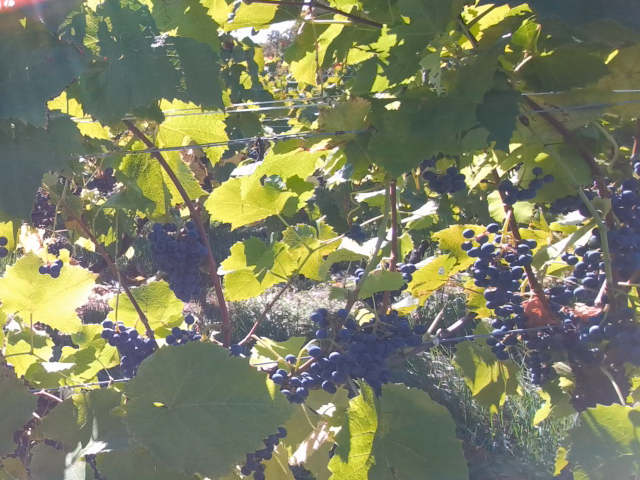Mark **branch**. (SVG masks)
<instances>
[{
	"label": "branch",
	"instance_id": "obj_9",
	"mask_svg": "<svg viewBox=\"0 0 640 480\" xmlns=\"http://www.w3.org/2000/svg\"><path fill=\"white\" fill-rule=\"evenodd\" d=\"M526 104H527L529 107H531V108H533V109H535V110H538V111L546 110V108H545L543 105H541L540 103H537V102L533 101L531 98H528V99L526 100Z\"/></svg>",
	"mask_w": 640,
	"mask_h": 480
},
{
	"label": "branch",
	"instance_id": "obj_1",
	"mask_svg": "<svg viewBox=\"0 0 640 480\" xmlns=\"http://www.w3.org/2000/svg\"><path fill=\"white\" fill-rule=\"evenodd\" d=\"M391 182H392V192H391V185L389 183H386L384 185V217L381 219V230H380L379 237L376 243L374 244V247L368 257V265L364 268L360 276V279L357 285L355 286V289L351 293L349 301L345 306V309L347 311H350L354 307L359 294L361 293L363 287L365 286L367 278L369 277L370 273L377 267L375 260L383 243L385 242L387 232H388V224H389L390 254L391 256L394 257V260L391 261L390 271L392 273H395L397 271L398 251H397V245H396V208H397L398 195H399V179L397 177H393L391 179Z\"/></svg>",
	"mask_w": 640,
	"mask_h": 480
},
{
	"label": "branch",
	"instance_id": "obj_5",
	"mask_svg": "<svg viewBox=\"0 0 640 480\" xmlns=\"http://www.w3.org/2000/svg\"><path fill=\"white\" fill-rule=\"evenodd\" d=\"M548 123H550L553 127L559 130L567 140L573 145V147L579 151L581 157L585 160L589 168L591 169L593 175L597 180L598 189L600 195L604 198L609 196V192L606 190L604 178L599 171L597 165L594 163L593 159L590 157L588 152L586 151V147L579 143V141L572 135V133L561 123H559L554 117H552L549 113L540 114Z\"/></svg>",
	"mask_w": 640,
	"mask_h": 480
},
{
	"label": "branch",
	"instance_id": "obj_6",
	"mask_svg": "<svg viewBox=\"0 0 640 480\" xmlns=\"http://www.w3.org/2000/svg\"><path fill=\"white\" fill-rule=\"evenodd\" d=\"M525 272L527 273L536 293L538 296V299L541 302V305L544 307L546 314L548 315V317L554 322L557 323L559 321L558 316L553 312L551 305L549 304L544 290L538 280V278L536 277V274L534 273L532 267L530 265H526L524 267Z\"/></svg>",
	"mask_w": 640,
	"mask_h": 480
},
{
	"label": "branch",
	"instance_id": "obj_4",
	"mask_svg": "<svg viewBox=\"0 0 640 480\" xmlns=\"http://www.w3.org/2000/svg\"><path fill=\"white\" fill-rule=\"evenodd\" d=\"M41 187L47 192L49 193L51 196H53L56 201L61 204L64 209L69 212V214L71 216H73L75 218V220L77 221V223L79 224L80 228L85 232V234L87 235V237L89 238L91 244L97 249L98 253L101 255L102 259L110 266L111 269H113V271L116 273V275L118 276L119 280H120V284L122 285V287L124 288L125 292L127 293L130 301L132 304H134V307L137 311V313L140 316L141 319V323L143 325V327L147 330V332L149 333V336L151 338L155 337V333L154 330L152 329V327L147 323L146 317H145V313L143 312L142 308L139 305V302L136 300V298L134 297V294L132 292V290L130 289V287L127 285L126 281H125V277L123 275V273L121 272V270L114 264V262L112 260L109 259V257L107 256L105 250L100 246V244L96 241L95 237L93 236V234L91 233V231L88 229V227L84 224V221L81 219L80 215L77 214L73 209L70 208V206L67 204V202L61 198V196L54 191L53 189H51L48 185H46L45 183L41 184Z\"/></svg>",
	"mask_w": 640,
	"mask_h": 480
},
{
	"label": "branch",
	"instance_id": "obj_2",
	"mask_svg": "<svg viewBox=\"0 0 640 480\" xmlns=\"http://www.w3.org/2000/svg\"><path fill=\"white\" fill-rule=\"evenodd\" d=\"M155 159L159 164L164 167L165 173L167 176L173 181L174 185L179 189L185 204L188 208L191 220L196 224L202 244L209 248V256L208 260V268L211 274V283L215 289V293L217 294L220 301V311H221V341L225 347H229L231 345V329L229 325L228 319V309H227V298L222 290L221 284L218 281V271L215 266V257L213 256V252L210 246V241L207 236L206 228L201 220V217L197 214L194 203L191 199V196L186 188V186L180 181V178L173 172L171 165L169 162L163 158L161 153H154Z\"/></svg>",
	"mask_w": 640,
	"mask_h": 480
},
{
	"label": "branch",
	"instance_id": "obj_7",
	"mask_svg": "<svg viewBox=\"0 0 640 480\" xmlns=\"http://www.w3.org/2000/svg\"><path fill=\"white\" fill-rule=\"evenodd\" d=\"M504 212L506 214V217L510 225V231H511L512 237L515 240H519L521 238V235L518 232L516 219H515V216L513 215L515 213L514 206L512 204L506 205L504 207Z\"/></svg>",
	"mask_w": 640,
	"mask_h": 480
},
{
	"label": "branch",
	"instance_id": "obj_3",
	"mask_svg": "<svg viewBox=\"0 0 640 480\" xmlns=\"http://www.w3.org/2000/svg\"><path fill=\"white\" fill-rule=\"evenodd\" d=\"M526 128L531 134H533L535 137H538L546 145V148L549 154L554 159L555 164L561 170L565 180L579 195L582 202L592 210V213L596 219V225L599 228V232L601 236V255L604 263V283L607 287H611L613 285L614 276L611 274V261L608 253V234L606 230V225L603 222V217L598 206L588 198L587 194L582 190L580 185L571 176V173L569 172L568 168L566 167L564 162L561 160V157L556 152L553 146V143L547 138V136L542 131L534 127L531 121H528L526 123Z\"/></svg>",
	"mask_w": 640,
	"mask_h": 480
},
{
	"label": "branch",
	"instance_id": "obj_8",
	"mask_svg": "<svg viewBox=\"0 0 640 480\" xmlns=\"http://www.w3.org/2000/svg\"><path fill=\"white\" fill-rule=\"evenodd\" d=\"M124 125L128 129L132 130L133 133L138 138H140L145 144H147L150 148H157L156 143L153 140H151L145 133H143L135 123L131 122L129 119H126L124 121Z\"/></svg>",
	"mask_w": 640,
	"mask_h": 480
}]
</instances>
